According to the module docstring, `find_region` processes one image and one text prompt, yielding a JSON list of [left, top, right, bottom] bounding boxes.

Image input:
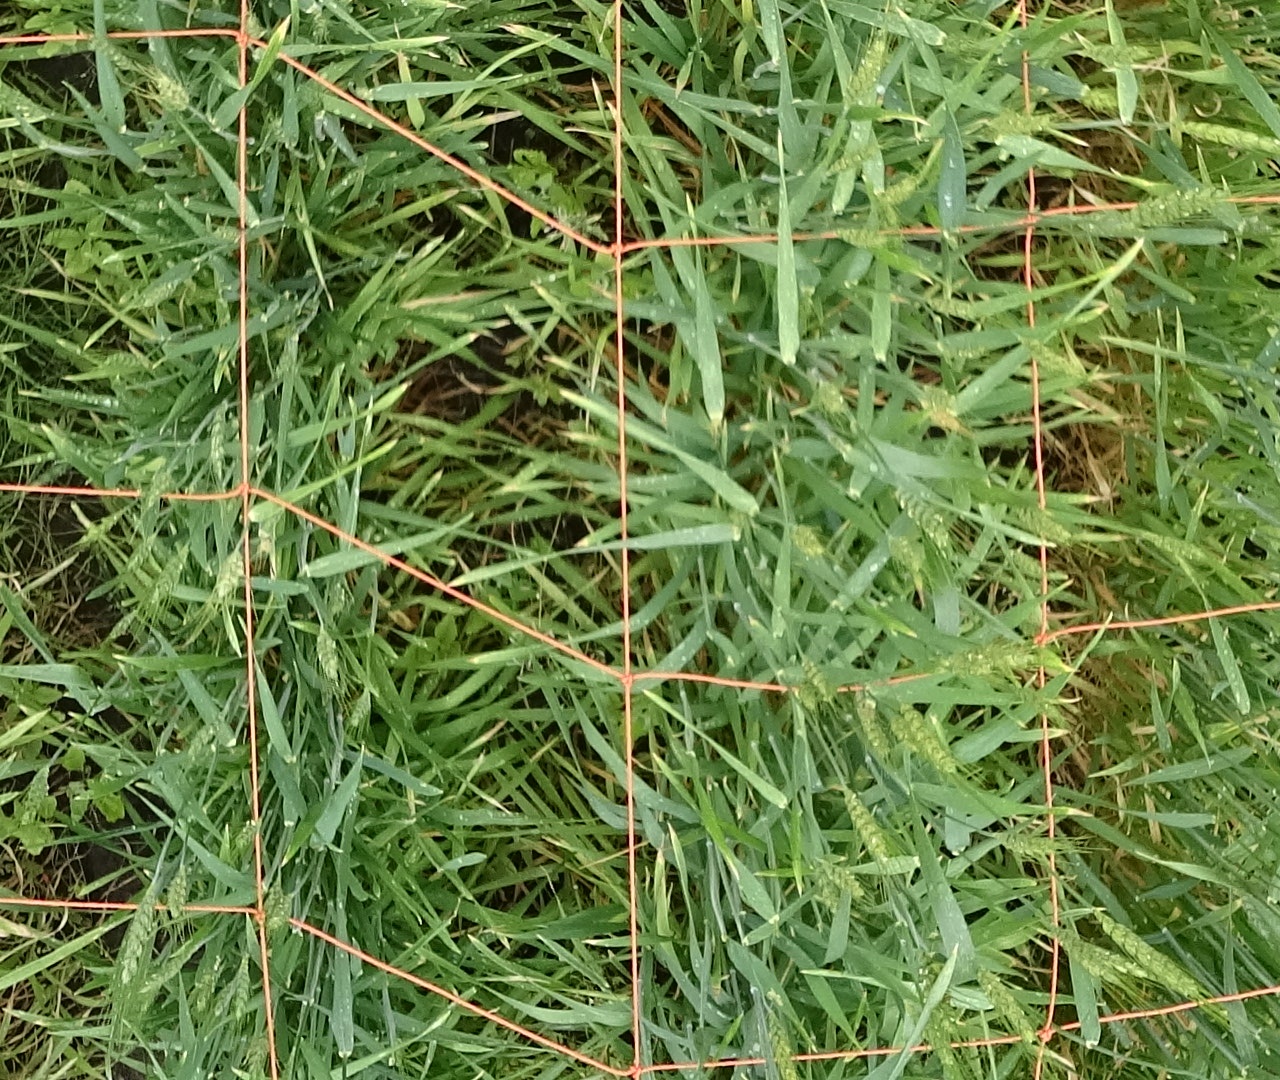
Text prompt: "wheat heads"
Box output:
[[1117, 188, 1221, 228], [147, 471, 174, 505], [258, 883, 295, 921], [1083, 86, 1115, 112], [844, 223, 885, 249], [991, 112, 1058, 133], [1233, 877, 1268, 938], [925, 1020, 954, 1067], [219, 548, 245, 591], [214, 979, 243, 1014], [877, 172, 919, 200], [247, 1029, 275, 1074], [142, 278, 179, 304], [819, 376, 840, 411], [236, 963, 258, 1015], [847, 25, 888, 95], [107, 354, 145, 367], [313, 626, 342, 674], [932, 638, 1055, 676], [769, 1018, 794, 1077], [154, 70, 192, 111], [858, 700, 890, 759], [830, 145, 876, 175], [192, 969, 213, 1009], [243, 10, 260, 38], [214, 226, 242, 250], [154, 552, 184, 601], [982, 964, 1034, 1047], [190, 715, 224, 762], [1099, 910, 1190, 992], [797, 523, 827, 558], [840, 789, 884, 854], [210, 402, 232, 469], [934, 1000, 962, 1035], [1086, 39, 1149, 66], [922, 384, 956, 420], [258, 511, 283, 552], [800, 650, 826, 693], [1052, 927, 1122, 979], [893, 484, 947, 543], [1154, 535, 1203, 561], [936, 292, 986, 321], [1016, 500, 1070, 539], [269, 116, 285, 140], [129, 532, 160, 567], [91, 33, 130, 71], [900, 698, 960, 774], [997, 834, 1075, 852], [1023, 335, 1081, 374], [818, 852, 863, 898], [238, 818, 262, 842], [113, 891, 153, 979], [352, 691, 371, 724], [88, 506, 127, 538], [1010, 551, 1050, 576], [1169, 122, 1280, 159], [167, 872, 186, 914], [147, 941, 197, 990], [884, 531, 923, 570], [332, 580, 347, 613], [20, 771, 48, 818]]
